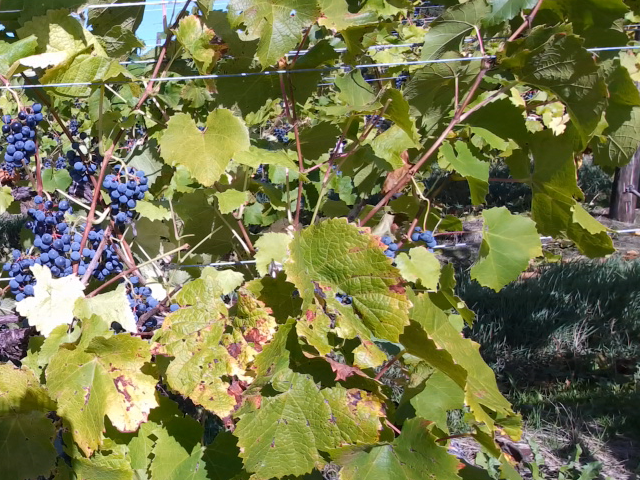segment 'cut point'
Wrapping results in <instances>:
<instances>
[{"label":"cut point","mask_w":640,"mask_h":480,"mask_svg":"<svg viewBox=\"0 0 640 480\" xmlns=\"http://www.w3.org/2000/svg\"><path fill=\"white\" fill-rule=\"evenodd\" d=\"M409 180H410V182H411V183H413V184H414V186H415V188H416V190H417L418 194H419V195H420V197H421V200L425 201V202H426V204H429V199H428V198H426V197H424V195H423V193L421 192V189H420V187H419L418 183H417V182H416L412 177H411Z\"/></svg>","instance_id":"6a23745f"},{"label":"cut point","mask_w":640,"mask_h":480,"mask_svg":"<svg viewBox=\"0 0 640 480\" xmlns=\"http://www.w3.org/2000/svg\"><path fill=\"white\" fill-rule=\"evenodd\" d=\"M123 279L125 280L126 284H127L128 286H130V289H131V290H134V286H133V284L129 281L128 277H127V276H125V277H123Z\"/></svg>","instance_id":"7d7e1d6f"}]
</instances>
